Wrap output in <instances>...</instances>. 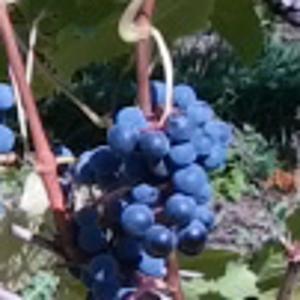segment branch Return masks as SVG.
Wrapping results in <instances>:
<instances>
[{
	"mask_svg": "<svg viewBox=\"0 0 300 300\" xmlns=\"http://www.w3.org/2000/svg\"><path fill=\"white\" fill-rule=\"evenodd\" d=\"M0 39L12 78L15 81L24 118L31 132L36 172L48 195L54 222L66 254L70 261L78 262L82 258V253L75 236L69 208L63 201L64 193L59 181V161L54 157L47 132L41 128L32 90L26 78L16 39L11 29L8 7L3 1H0Z\"/></svg>",
	"mask_w": 300,
	"mask_h": 300,
	"instance_id": "30e6481e",
	"label": "branch"
},
{
	"mask_svg": "<svg viewBox=\"0 0 300 300\" xmlns=\"http://www.w3.org/2000/svg\"><path fill=\"white\" fill-rule=\"evenodd\" d=\"M156 7L155 0H144L133 19L135 32L134 58L136 64L137 96L135 103L143 116L149 117L154 113L150 99L149 59L147 54L150 15Z\"/></svg>",
	"mask_w": 300,
	"mask_h": 300,
	"instance_id": "325d2c04",
	"label": "branch"
},
{
	"mask_svg": "<svg viewBox=\"0 0 300 300\" xmlns=\"http://www.w3.org/2000/svg\"><path fill=\"white\" fill-rule=\"evenodd\" d=\"M166 274L168 288L173 300H187V295L183 289L180 269H179V259L175 255H170L166 259Z\"/></svg>",
	"mask_w": 300,
	"mask_h": 300,
	"instance_id": "170604dd",
	"label": "branch"
}]
</instances>
